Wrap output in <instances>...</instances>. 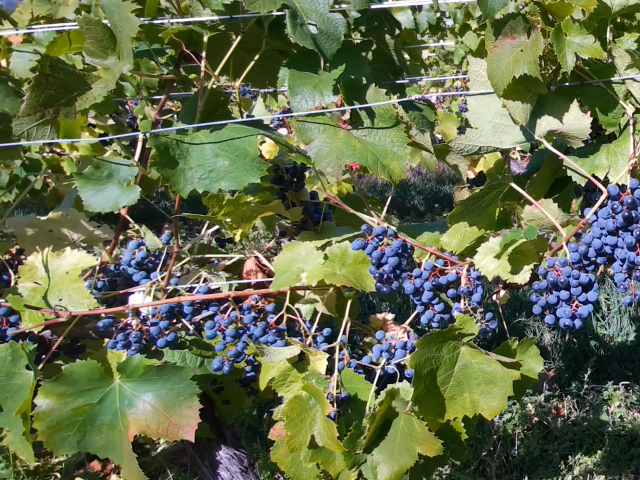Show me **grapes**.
<instances>
[{
	"mask_svg": "<svg viewBox=\"0 0 640 480\" xmlns=\"http://www.w3.org/2000/svg\"><path fill=\"white\" fill-rule=\"evenodd\" d=\"M494 318V313L492 311H488L485 315H484V320L488 323V326H481L479 328V334L482 337H486L489 332L490 329L492 330H496L499 327V322Z\"/></svg>",
	"mask_w": 640,
	"mask_h": 480,
	"instance_id": "grapes-10",
	"label": "grapes"
},
{
	"mask_svg": "<svg viewBox=\"0 0 640 480\" xmlns=\"http://www.w3.org/2000/svg\"><path fill=\"white\" fill-rule=\"evenodd\" d=\"M640 183L637 178L628 181L632 195H625L623 199L619 187L609 184L606 194L609 200L591 215L587 224L592 227L583 233L582 229L574 235L578 241H570L567 246L570 252L567 257H547L545 262L549 268L558 265L562 274L558 276L554 271H547L545 266H538L536 273L545 279L531 284L533 291L546 293L552 288V295L542 297L538 292H532L529 300L533 304L532 312L540 315L547 304L555 307L556 316L560 319L558 325L563 329L574 327L581 329L583 320L594 311V305L599 298L597 277L591 273H582L579 268L584 266L586 271H594L596 264L605 265L609 256L614 261L610 265L615 290L619 294L628 291L631 278L626 273L635 270L632 278L640 283V254H635L636 245L640 240Z\"/></svg>",
	"mask_w": 640,
	"mask_h": 480,
	"instance_id": "grapes-1",
	"label": "grapes"
},
{
	"mask_svg": "<svg viewBox=\"0 0 640 480\" xmlns=\"http://www.w3.org/2000/svg\"><path fill=\"white\" fill-rule=\"evenodd\" d=\"M407 341L398 340L394 344V349L390 350L393 347L392 343H378L373 344L370 347L371 356L365 355L360 359L361 365H370L373 359H385L388 366L393 367H383L380 371L378 368H374L373 372L380 376H383L385 373L387 375H394L395 369H397L396 365L392 364V362H396L406 356V351L412 352L416 350L414 345V338L412 337V332L408 331L405 335Z\"/></svg>",
	"mask_w": 640,
	"mask_h": 480,
	"instance_id": "grapes-7",
	"label": "grapes"
},
{
	"mask_svg": "<svg viewBox=\"0 0 640 480\" xmlns=\"http://www.w3.org/2000/svg\"><path fill=\"white\" fill-rule=\"evenodd\" d=\"M221 310L219 303H209L208 301H182L181 303H170L163 306L151 307V314L156 315L159 313L161 318H153L149 321L147 315H143L140 309L135 310V317L140 324L150 326L146 332V335L151 339V342L156 347L166 348L168 342L173 341L177 337L175 331H168L166 335L161 334L162 329L169 328L172 324V320L176 318V312L182 316L187 322L192 320V317L209 312L217 313Z\"/></svg>",
	"mask_w": 640,
	"mask_h": 480,
	"instance_id": "grapes-5",
	"label": "grapes"
},
{
	"mask_svg": "<svg viewBox=\"0 0 640 480\" xmlns=\"http://www.w3.org/2000/svg\"><path fill=\"white\" fill-rule=\"evenodd\" d=\"M277 309L275 303H268L261 306L256 311L251 303H243L240 307L242 324L237 329H230L234 321L238 319L239 312L237 310L228 313L229 318H225L222 314H217L212 321H206L203 328L206 330L205 338L208 341L216 339L219 335H223L221 342L212 347L214 353L223 352L226 344H231L240 338L235 348L227 352V359L224 361L222 356L215 357L213 364L210 366L212 373L221 372L229 375L235 363L240 364L243 360L247 365L245 368V380L253 383L257 380L256 374L259 372L260 363L254 359L252 354L247 355V338L252 342H258L261 345H269L270 347H286L288 341L284 338V332L287 330L285 324L278 327H268L276 319L274 312Z\"/></svg>",
	"mask_w": 640,
	"mask_h": 480,
	"instance_id": "grapes-3",
	"label": "grapes"
},
{
	"mask_svg": "<svg viewBox=\"0 0 640 480\" xmlns=\"http://www.w3.org/2000/svg\"><path fill=\"white\" fill-rule=\"evenodd\" d=\"M11 313V308L10 307H0V317L4 318L8 316L9 322L10 323H16L21 319V314L20 313H14L13 315H10Z\"/></svg>",
	"mask_w": 640,
	"mask_h": 480,
	"instance_id": "grapes-11",
	"label": "grapes"
},
{
	"mask_svg": "<svg viewBox=\"0 0 640 480\" xmlns=\"http://www.w3.org/2000/svg\"><path fill=\"white\" fill-rule=\"evenodd\" d=\"M110 328L117 334L114 339H110L105 343L106 350L122 351L127 349L126 354L128 356H135L147 346V340L141 335L142 328L138 330L132 329L131 323L117 322V317L114 315H104L102 319L95 323L97 331H104Z\"/></svg>",
	"mask_w": 640,
	"mask_h": 480,
	"instance_id": "grapes-6",
	"label": "grapes"
},
{
	"mask_svg": "<svg viewBox=\"0 0 640 480\" xmlns=\"http://www.w3.org/2000/svg\"><path fill=\"white\" fill-rule=\"evenodd\" d=\"M333 333V330L330 327H324L319 335L315 336V341L313 342V346L315 349H321L323 352H328L329 348L328 343L325 342V337L330 336Z\"/></svg>",
	"mask_w": 640,
	"mask_h": 480,
	"instance_id": "grapes-9",
	"label": "grapes"
},
{
	"mask_svg": "<svg viewBox=\"0 0 640 480\" xmlns=\"http://www.w3.org/2000/svg\"><path fill=\"white\" fill-rule=\"evenodd\" d=\"M393 338H395V335L392 334L390 339H386V332L384 330H378L374 332V339L376 341H393Z\"/></svg>",
	"mask_w": 640,
	"mask_h": 480,
	"instance_id": "grapes-14",
	"label": "grapes"
},
{
	"mask_svg": "<svg viewBox=\"0 0 640 480\" xmlns=\"http://www.w3.org/2000/svg\"><path fill=\"white\" fill-rule=\"evenodd\" d=\"M482 273L475 267H471L467 272V279L471 282L469 285L461 284L458 289L448 288L446 290V296L448 299L456 298L459 296H467L469 293L472 295L468 300L470 306H481L483 300V280L480 278Z\"/></svg>",
	"mask_w": 640,
	"mask_h": 480,
	"instance_id": "grapes-8",
	"label": "grapes"
},
{
	"mask_svg": "<svg viewBox=\"0 0 640 480\" xmlns=\"http://www.w3.org/2000/svg\"><path fill=\"white\" fill-rule=\"evenodd\" d=\"M16 331H17L16 326H12V327L0 326V335H4L3 337L4 342H8L11 339H13Z\"/></svg>",
	"mask_w": 640,
	"mask_h": 480,
	"instance_id": "grapes-12",
	"label": "grapes"
},
{
	"mask_svg": "<svg viewBox=\"0 0 640 480\" xmlns=\"http://www.w3.org/2000/svg\"><path fill=\"white\" fill-rule=\"evenodd\" d=\"M358 365H359V361L357 359L349 360V368L352 369V371L354 373H357L358 375H364L365 371L361 368H357Z\"/></svg>",
	"mask_w": 640,
	"mask_h": 480,
	"instance_id": "grapes-13",
	"label": "grapes"
},
{
	"mask_svg": "<svg viewBox=\"0 0 640 480\" xmlns=\"http://www.w3.org/2000/svg\"><path fill=\"white\" fill-rule=\"evenodd\" d=\"M362 234L370 233L374 236L370 241L364 238H355L350 242V248L353 251L363 250L366 255L371 258L369 260L368 273L372 276L375 283V288L380 290L383 295H388L390 292H397L399 287L404 288V294L410 295L412 303L415 305V311L417 313H423L420 317L421 325H428L433 328L439 327V322L449 321L452 317H455L454 313H462V307L459 302H455L450 310V313H441L445 310L446 304L444 301H440L439 296H435L432 290L435 286L446 285L448 282L454 283L458 275L456 273H447L446 275L437 274L434 275L430 281V271L434 269V262L432 260H425L423 262V269H412V276L408 272H403L408 265V252L411 250V244L404 242L401 239H394L392 244L387 245L384 251L376 250L379 247L384 237L394 238L396 233L393 229H387L384 225L371 227L369 224H363L360 227Z\"/></svg>",
	"mask_w": 640,
	"mask_h": 480,
	"instance_id": "grapes-2",
	"label": "grapes"
},
{
	"mask_svg": "<svg viewBox=\"0 0 640 480\" xmlns=\"http://www.w3.org/2000/svg\"><path fill=\"white\" fill-rule=\"evenodd\" d=\"M145 245V238L128 240L127 248L124 250L123 257L118 260V264L102 268V273L108 278L107 283L105 280H98L92 288L93 280L86 279L85 288L90 289L91 293L102 290L119 291L154 281L158 277L163 253L156 250L153 256H149L148 252L140 248Z\"/></svg>",
	"mask_w": 640,
	"mask_h": 480,
	"instance_id": "grapes-4",
	"label": "grapes"
}]
</instances>
